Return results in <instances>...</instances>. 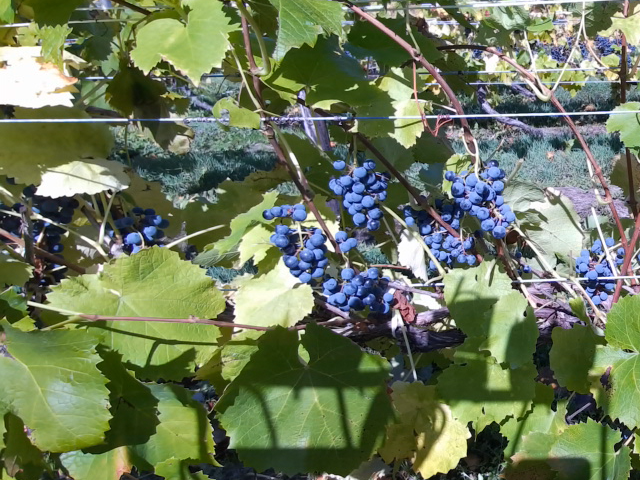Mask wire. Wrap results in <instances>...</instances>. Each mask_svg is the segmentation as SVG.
<instances>
[{
  "label": "wire",
  "mask_w": 640,
  "mask_h": 480,
  "mask_svg": "<svg viewBox=\"0 0 640 480\" xmlns=\"http://www.w3.org/2000/svg\"><path fill=\"white\" fill-rule=\"evenodd\" d=\"M609 114H626L640 115V110L628 109H606V110H589V111H548V112H519V113H503V112H483V113H456V114H418V115H392V116H264L260 118L261 122L266 121H394V120H420V119H459V118H485V117H501V118H521L534 117L544 119L545 117L561 116H591V115H609Z\"/></svg>",
  "instance_id": "obj_1"
},
{
  "label": "wire",
  "mask_w": 640,
  "mask_h": 480,
  "mask_svg": "<svg viewBox=\"0 0 640 480\" xmlns=\"http://www.w3.org/2000/svg\"><path fill=\"white\" fill-rule=\"evenodd\" d=\"M130 122H149V123H198L208 122L217 123V118L211 117H196V118H151V117H127V118H105V119H91V118H41V119H15V118H1L0 124L13 123V124H60V123H89V124H107V123H130Z\"/></svg>",
  "instance_id": "obj_2"
},
{
  "label": "wire",
  "mask_w": 640,
  "mask_h": 480,
  "mask_svg": "<svg viewBox=\"0 0 640 480\" xmlns=\"http://www.w3.org/2000/svg\"><path fill=\"white\" fill-rule=\"evenodd\" d=\"M588 277H530L523 279H510V284H525L532 282H554V283H563V282H588Z\"/></svg>",
  "instance_id": "obj_3"
}]
</instances>
